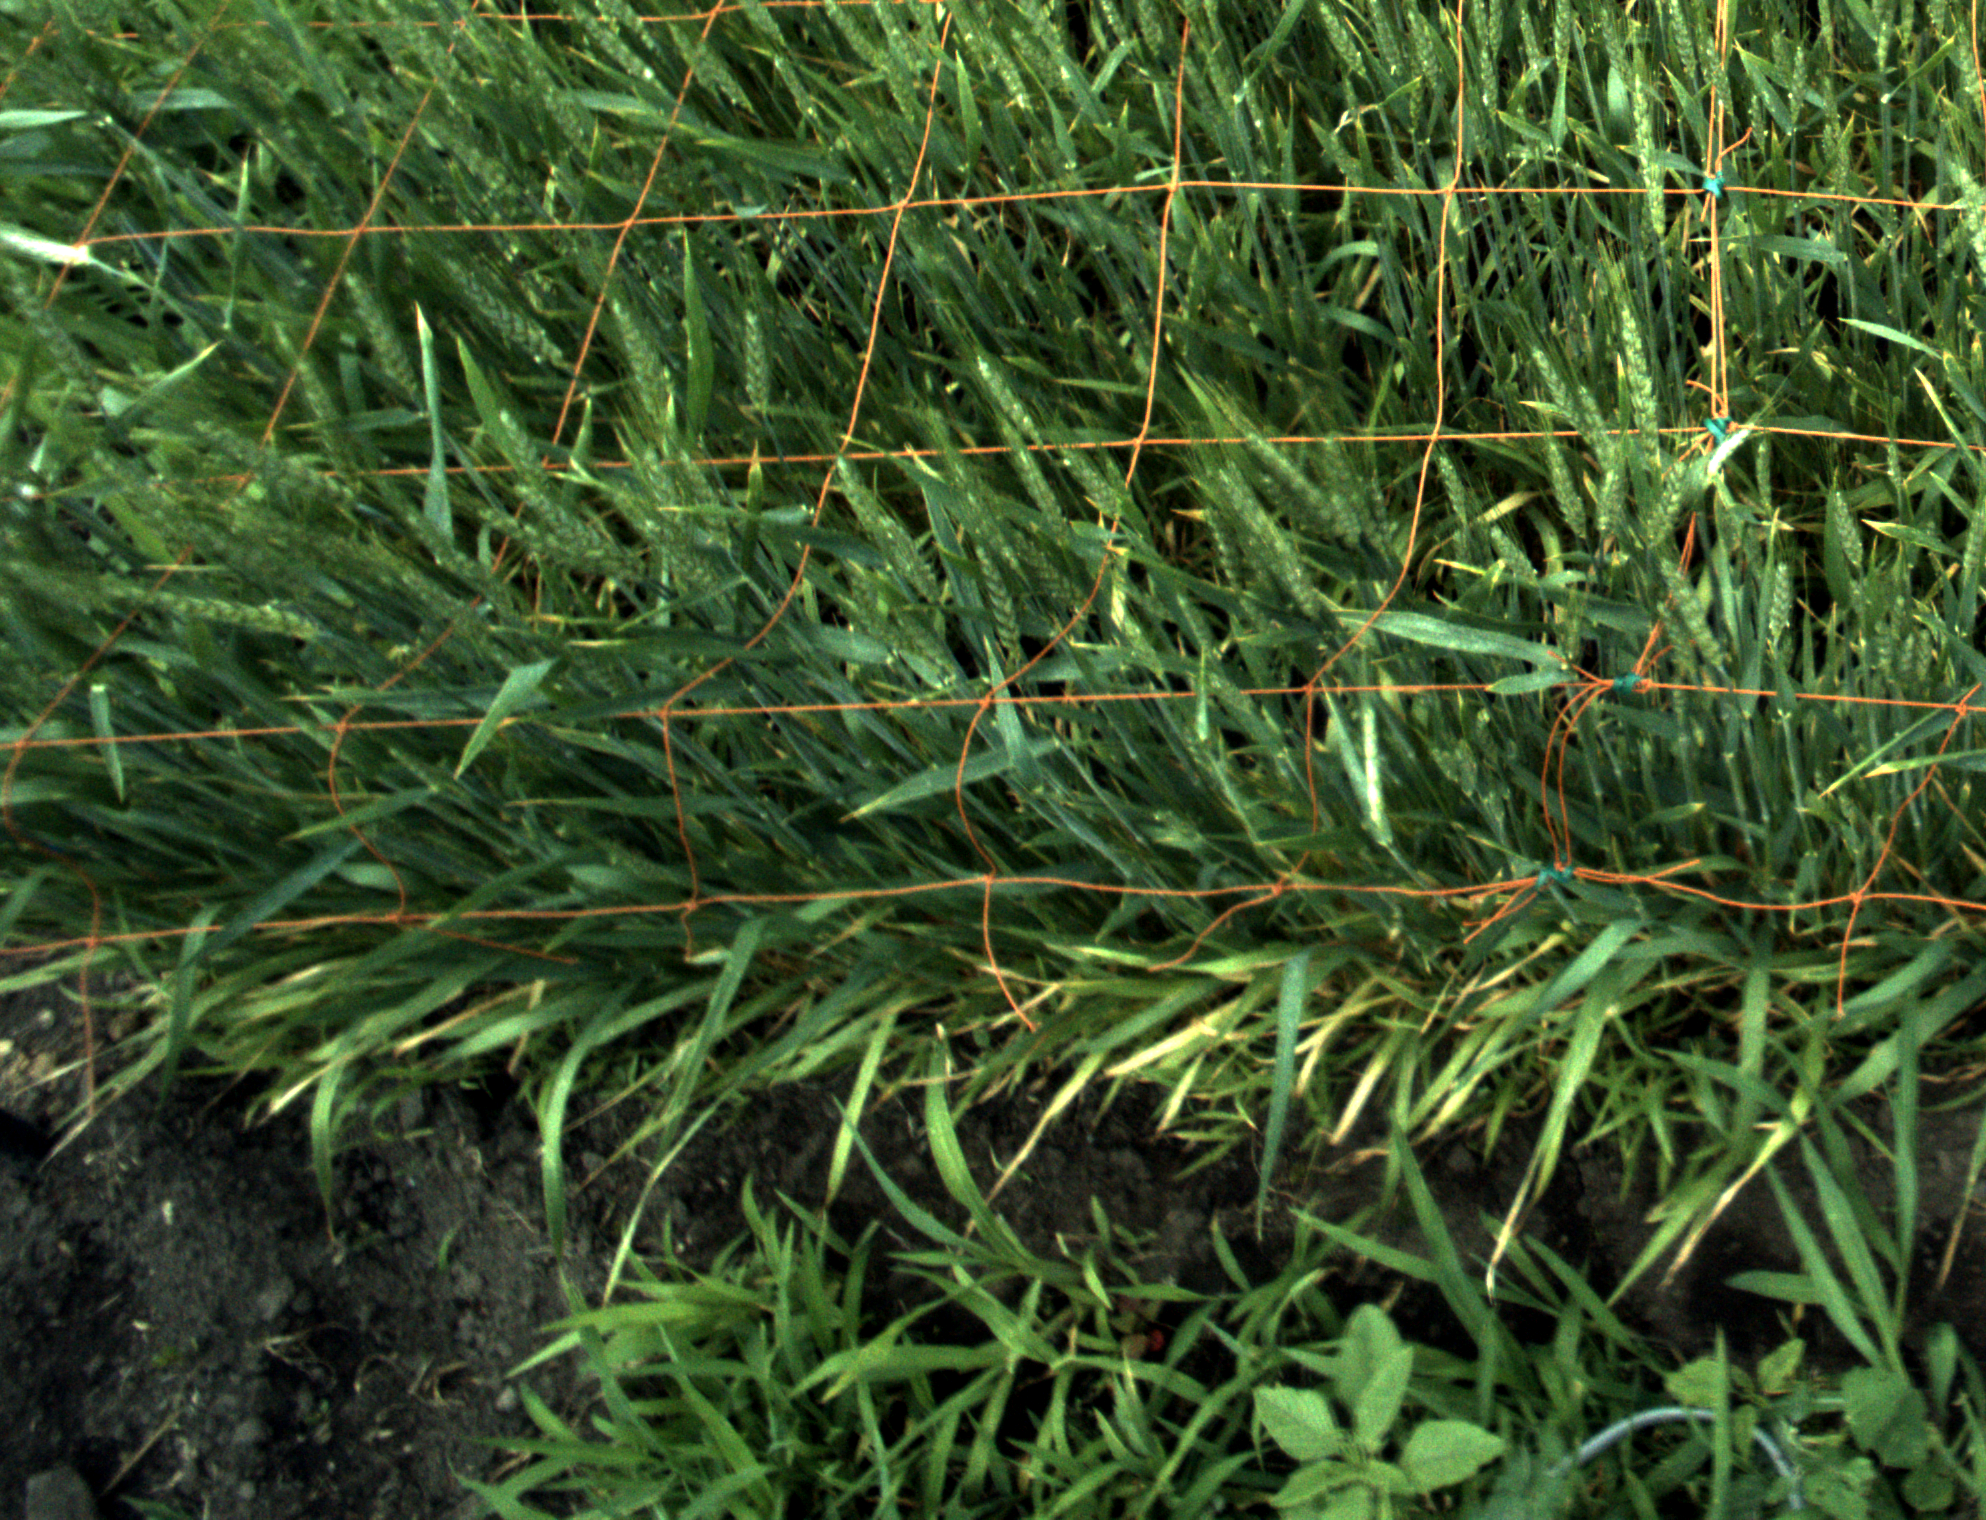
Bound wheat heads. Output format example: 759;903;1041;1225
1319;0;1370;79
1961;212;1986;327
1700;31;1735;119
1185;723;1207;771
416;117;523;194
770;50;813;112
220;496;384;570
1670;0;1698;81
191;416;359;520
432;2;493;74
1449;529;1474;568
1768;31;1790;66
726;0;786;44
446;255;575;375
1054;437;1130;511
1092;0;1129;40
872;107;921;178
423;0;509;67
1654;600;1699;671
223;51;289;119
1236;528;1283;595
887;184;942;257
1748;90;1770;148
1478;43;1501;117
980;30;1032;112
1207;668;1254;706
1244;75;1266;121
1885;441;1903;494
876;47;916;118
1658;556;1727;673
1963;512;1986;575
1130;0;1166;55
1450;734;1479;778
1014;440;1080;547
1915;626;1934;684
1468;98;1487;147
1322;433;1382;544
1599;5;1632;85
878;513;944;608
0;261;107;411
869;621;928;659
108;0;190;59
1516;4;1540;59
1408;50;1427;124
1671;683;1687;716
940;0;982;57
1470;518;1496;568
192;518;299;589
372;0;474;116
1101;453;1132;494
610;295;670;419
1847;576;1869;630
1437;451;1469;525
1888;595;1903;649
639;137;696;211
236;24;307;81
894;0;938;39
1235;595;1271;634
677;455;733;538
1370;0;1405;73
1241;431;1334;520
20;0;113;24
568;6;665;90
1614;301;1664;473
1831;148;1852;201
571;0;661;56
1833;487;1866;568
1000;524;1094;609
1260;472;1319;527
1561;616;1583;658
390;748;475;806
1328;493;1364;549
1823;74;1841;124
0;49;105;124
1004;0;1063;50
1339;68;1359;113
1788;46;1809;123
1119;581;1181;619
1178;592;1211;650
1577;384;1621;470
4;604;74;671
104;574;322;645
89;71;156;129
835;456;887;539
624;511;719;599
293;355;367;494
629;445;685;528
975;517;1028;579
90;448;186;528
1956;19;1986;113
496;407;563;501
978;351;1045;446
739;309;775;416
1898;0;1917;46
1145;808;1199;841
973;542;1025;662
324;0;363;49
1474;708;1498;756
1873;618;1896;674
821;0;883;71
1361;473;1393;544
510;477;651;584
1641;463;1689;546
1821;121;1836;160
1766;561;1795;639
893;603;958;673
1895;635;1916;685
1629;72;1671;240
476;506;610;581
1730;514;1769;581
696;39;754;113
1530;344;1591;440
1180;53;1227;125
4;557;116;621
840;558;881;621
396;559;485;635
1472;0;1488;42
867;0;910;58
1008;29;1077;100
491;625;645;700
342;266;422;401
1545;440;1587;538
401;504;515;620
1706;425;1756;478
1595;468;1625;537
1487;525;1538;582
1926;0;1949;36
1485;0;1505;50
667;20;720;98
1552;0;1573;69
520;48;588;152
1407;11;1439;90
1877;8;1896;67
626;852;683;890
1359;708;1382;829
1119;615;1165;677
1203;47;1238;117
1872;0;1886;17
1210;467;1313;614
1430;749;1458;780
1753;441;1776;514
1198;496;1248;593
1814;0;1836;53
71;124;129;168
1639;193;1658;250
